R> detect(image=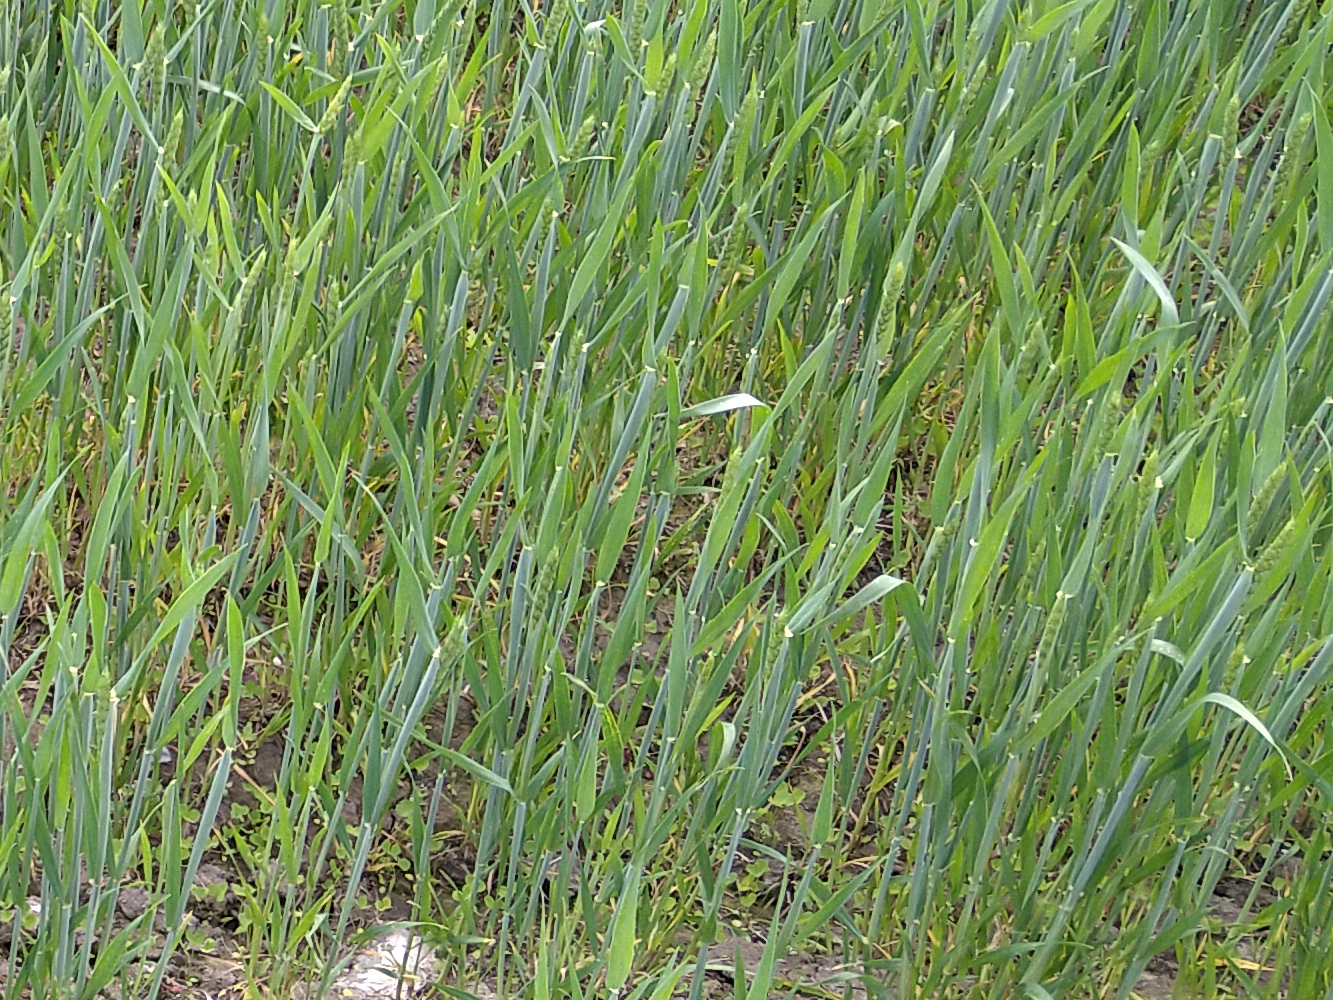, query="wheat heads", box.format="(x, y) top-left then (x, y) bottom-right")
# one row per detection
(1217, 646), (1245, 705)
(0, 297), (14, 372)
(328, 278), (340, 339)
(57, 215), (70, 289)
(98, 679), (107, 757)
(242, 252), (266, 310)
(565, 332), (583, 387)
(0, 0), (14, 14)
(565, 119), (597, 175)
(346, 135), (352, 186)
(1016, 537), (1046, 612)
(455, 0), (476, 77)
(1221, 95), (1241, 187)
(533, 546), (560, 631)
(877, 262), (905, 339)
(955, 57), (990, 125)
(714, 206), (747, 293)
(1063, 0), (1088, 27)
(548, 0), (572, 48)
(454, 629), (468, 693)
(686, 29), (718, 122)
(631, 0), (647, 69)
(796, 0), (808, 23)
(160, 110), (183, 200)
(1017, 324), (1044, 391)
(6, 0), (20, 51)
(964, 29), (981, 80)
(656, 54), (677, 106)
(724, 92), (751, 169)
(868, 95), (878, 167)
(1038, 595), (1068, 663)
(0, 65), (9, 137)
(416, 0), (479, 52)
(1244, 460), (1287, 540)
(334, 0), (351, 74)
(424, 615), (462, 709)
(1186, 85), (1215, 135)
(768, 622), (782, 673)
(83, 0), (96, 59)
(1140, 135), (1161, 186)
(175, 0), (194, 40)
(608, 0), (627, 16)
(1277, 0), (1319, 56)
(694, 655), (714, 702)
(537, 352), (551, 419)
(1066, 635), (1083, 678)
(0, 115), (12, 203)
(753, 9), (779, 63)
(1249, 521), (1294, 595)
(238, 0), (250, 20)
(154, 56), (169, 110)
(1010, 621), (1027, 673)
(31, 0), (44, 47)
(256, 12), (268, 68)
(130, 33), (163, 89)
(320, 78), (349, 130)
(1275, 113), (1315, 201)
(281, 242), (294, 314)
(425, 58), (448, 115)
(389, 151), (405, 216)
(1134, 453), (1159, 521)
(931, 521), (960, 564)
(724, 445), (742, 505)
